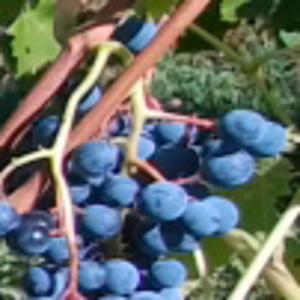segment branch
<instances>
[{"label": "branch", "instance_id": "obj_2", "mask_svg": "<svg viewBox=\"0 0 300 300\" xmlns=\"http://www.w3.org/2000/svg\"><path fill=\"white\" fill-rule=\"evenodd\" d=\"M212 4L213 0H187L172 12L162 31L140 53L133 65L112 84L99 102L74 124L69 134V142L61 155L63 161L68 159L75 146L88 142L99 132L102 123L114 114L125 99L130 86L144 75L149 64L190 29Z\"/></svg>", "mask_w": 300, "mask_h": 300}, {"label": "branch", "instance_id": "obj_1", "mask_svg": "<svg viewBox=\"0 0 300 300\" xmlns=\"http://www.w3.org/2000/svg\"><path fill=\"white\" fill-rule=\"evenodd\" d=\"M136 0H109L96 11L83 28L73 32L60 54L48 65L44 75L27 93V98L0 123V154L9 155L21 142L28 127L52 95L77 72L90 51L112 35L117 23L134 8Z\"/></svg>", "mask_w": 300, "mask_h": 300}, {"label": "branch", "instance_id": "obj_3", "mask_svg": "<svg viewBox=\"0 0 300 300\" xmlns=\"http://www.w3.org/2000/svg\"><path fill=\"white\" fill-rule=\"evenodd\" d=\"M50 164L51 161L44 158L22 186L5 197V201L12 204L17 213L36 209L45 194L54 188Z\"/></svg>", "mask_w": 300, "mask_h": 300}]
</instances>
